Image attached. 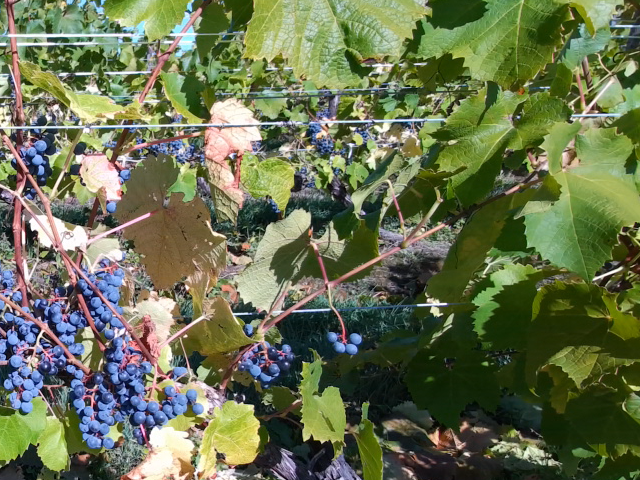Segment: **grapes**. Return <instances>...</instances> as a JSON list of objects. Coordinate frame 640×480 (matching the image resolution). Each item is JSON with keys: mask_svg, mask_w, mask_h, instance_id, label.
Wrapping results in <instances>:
<instances>
[{"mask_svg": "<svg viewBox=\"0 0 640 480\" xmlns=\"http://www.w3.org/2000/svg\"><path fill=\"white\" fill-rule=\"evenodd\" d=\"M81 268L92 283L100 289L110 305L113 306L117 312L124 315L125 309L123 306H119L118 301L121 299L119 287L123 284L125 272L122 269H118L108 273L103 270H96L93 273L89 272L87 265H82Z\"/></svg>", "mask_w": 640, "mask_h": 480, "instance_id": "5460f4e3", "label": "grapes"}, {"mask_svg": "<svg viewBox=\"0 0 640 480\" xmlns=\"http://www.w3.org/2000/svg\"><path fill=\"white\" fill-rule=\"evenodd\" d=\"M75 288L82 292L98 332L104 334L106 339L112 340V349H107L104 352V357L110 360L104 363V370L109 374V382L116 386V395L111 393L109 387L104 383V376L101 373L93 375L92 380L98 386L100 393L94 396L99 411L96 415L97 420L91 421L93 408L86 406L82 399L86 396V386L81 380L85 376L84 371L73 364L66 366L67 358L63 355V349L58 345L51 348L52 344L44 339H41V347L50 349V353L54 354L53 362L47 359V355L42 353L40 347H36V353H42L39 361V369L42 373H48L51 377H55L58 374V369L66 366V372L76 378L70 382V387L74 389L70 397L76 414L81 420L79 428L83 433L82 439L88 448L99 449L103 446L106 449H112L115 445L114 440L105 437L110 432L109 425H115L117 422L123 423L125 417L130 414L134 424H142L144 429H153L162 428L168 424L169 419H177L178 416L185 414L187 406L192 405V411L195 415H201L204 412V406L201 403H195L198 400V393L195 389H189L187 393H177L172 385L166 386L164 394L171 398V401H163L162 409L157 401L142 400L146 395L143 376L151 373L153 366L149 361H144L143 353L140 350L135 351L132 345H127L128 354L138 356V362L127 363L125 370L119 369V366L123 365L125 357L123 337L114 338V331L107 328V323L119 330H123L125 325L96 295L94 289L85 279H78L75 282Z\"/></svg>", "mask_w": 640, "mask_h": 480, "instance_id": "01657485", "label": "grapes"}, {"mask_svg": "<svg viewBox=\"0 0 640 480\" xmlns=\"http://www.w3.org/2000/svg\"><path fill=\"white\" fill-rule=\"evenodd\" d=\"M264 345L268 348V359L270 361H276L272 363L268 368V371H263L261 366L265 363V357L263 354H256L260 350L264 349L263 345L254 347L250 352L245 354L238 362V369L240 371L249 372L250 375L256 380L261 381L260 387L262 389H269L271 383L276 381L281 374V370H289L291 368V362L295 359V354L292 352V348L289 344H283L281 351L285 354L280 356L275 346H272L268 340L264 341Z\"/></svg>", "mask_w": 640, "mask_h": 480, "instance_id": "0513c4c2", "label": "grapes"}, {"mask_svg": "<svg viewBox=\"0 0 640 480\" xmlns=\"http://www.w3.org/2000/svg\"><path fill=\"white\" fill-rule=\"evenodd\" d=\"M13 278H14V272L11 269L5 268L3 270V268L0 267V282L5 287L1 290V293L5 297H7L13 289V280H12Z\"/></svg>", "mask_w": 640, "mask_h": 480, "instance_id": "e5b3c951", "label": "grapes"}, {"mask_svg": "<svg viewBox=\"0 0 640 480\" xmlns=\"http://www.w3.org/2000/svg\"><path fill=\"white\" fill-rule=\"evenodd\" d=\"M34 307L43 310L45 315L43 321L45 323L51 320L56 324L55 330L60 333L59 338L68 346L73 356H80L85 353V346L81 342H76V338L74 337L77 334L76 330L84 329L88 326L87 319L82 310L72 311L66 316L65 321L63 320L61 310H65L67 304L63 301L48 305L46 299H36L34 301Z\"/></svg>", "mask_w": 640, "mask_h": 480, "instance_id": "84f90ec7", "label": "grapes"}, {"mask_svg": "<svg viewBox=\"0 0 640 480\" xmlns=\"http://www.w3.org/2000/svg\"><path fill=\"white\" fill-rule=\"evenodd\" d=\"M341 335L335 332H329L327 334V341L332 344V349L336 353H346L347 355H357L359 348L363 344V338L358 333H352L350 335V343H342Z\"/></svg>", "mask_w": 640, "mask_h": 480, "instance_id": "83cd7487", "label": "grapes"}, {"mask_svg": "<svg viewBox=\"0 0 640 480\" xmlns=\"http://www.w3.org/2000/svg\"><path fill=\"white\" fill-rule=\"evenodd\" d=\"M4 318L7 322L15 323L18 327L17 330L9 329L6 332V339H0V361L7 359L4 353L9 349V346H12L14 355L8 359V365L12 369L21 370L20 373L10 371L8 378L3 381V388L6 391H12L8 397L13 409H22L25 414H30L34 406L32 400L38 396L39 390L43 388L45 376L38 370L32 371L21 356L24 351L18 349L35 343L40 326L23 317H17L12 311H6Z\"/></svg>", "mask_w": 640, "mask_h": 480, "instance_id": "b958b902", "label": "grapes"}, {"mask_svg": "<svg viewBox=\"0 0 640 480\" xmlns=\"http://www.w3.org/2000/svg\"><path fill=\"white\" fill-rule=\"evenodd\" d=\"M55 137L52 133H46L45 137L34 142V147L20 148L21 160L25 162L27 169L31 174L36 175V181L39 186H45L47 176L52 173L50 159L45 155H53L56 148L53 146Z\"/></svg>", "mask_w": 640, "mask_h": 480, "instance_id": "f8a65327", "label": "grapes"}]
</instances>
